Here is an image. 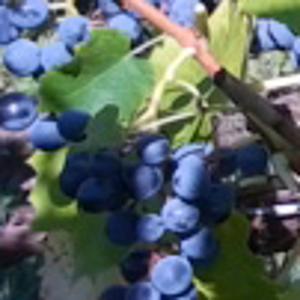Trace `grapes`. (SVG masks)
<instances>
[{"label": "grapes", "mask_w": 300, "mask_h": 300, "mask_svg": "<svg viewBox=\"0 0 300 300\" xmlns=\"http://www.w3.org/2000/svg\"><path fill=\"white\" fill-rule=\"evenodd\" d=\"M128 182L118 163L81 151L67 159L61 189L84 215L111 213L104 225L109 245H158L170 233L180 237V257L161 259L148 273L152 254L135 250L120 264L124 285L102 291L100 300H200L192 283L195 269L220 255L215 224L234 213V188L221 179L233 171L256 176L265 171L262 145L240 150L196 143L169 153V139L153 133L139 140Z\"/></svg>", "instance_id": "01657485"}, {"label": "grapes", "mask_w": 300, "mask_h": 300, "mask_svg": "<svg viewBox=\"0 0 300 300\" xmlns=\"http://www.w3.org/2000/svg\"><path fill=\"white\" fill-rule=\"evenodd\" d=\"M49 16L46 0H0V48L5 49L3 62L10 74L37 81L47 71L70 65L74 50L89 41L91 24L81 15L64 19L58 29V41L43 48L22 37V32L43 31Z\"/></svg>", "instance_id": "b958b902"}, {"label": "grapes", "mask_w": 300, "mask_h": 300, "mask_svg": "<svg viewBox=\"0 0 300 300\" xmlns=\"http://www.w3.org/2000/svg\"><path fill=\"white\" fill-rule=\"evenodd\" d=\"M39 99L32 92H8L0 96V128L7 133L29 130L33 148L41 153H53L70 143L87 139V124L91 115L85 110H70L59 119L47 115L37 120Z\"/></svg>", "instance_id": "0513c4c2"}, {"label": "grapes", "mask_w": 300, "mask_h": 300, "mask_svg": "<svg viewBox=\"0 0 300 300\" xmlns=\"http://www.w3.org/2000/svg\"><path fill=\"white\" fill-rule=\"evenodd\" d=\"M254 52L265 56L272 50L290 51L293 65L300 69V37L294 29L285 24L281 16H272L257 21L253 27Z\"/></svg>", "instance_id": "84f90ec7"}, {"label": "grapes", "mask_w": 300, "mask_h": 300, "mask_svg": "<svg viewBox=\"0 0 300 300\" xmlns=\"http://www.w3.org/2000/svg\"><path fill=\"white\" fill-rule=\"evenodd\" d=\"M98 9L105 18L104 26L108 30L130 32L129 41L133 45L143 44L147 34L142 30L139 15L117 0H98Z\"/></svg>", "instance_id": "f8a65327"}, {"label": "grapes", "mask_w": 300, "mask_h": 300, "mask_svg": "<svg viewBox=\"0 0 300 300\" xmlns=\"http://www.w3.org/2000/svg\"><path fill=\"white\" fill-rule=\"evenodd\" d=\"M149 3L154 7L167 8L168 17L187 28L198 21L201 0H149Z\"/></svg>", "instance_id": "5460f4e3"}]
</instances>
